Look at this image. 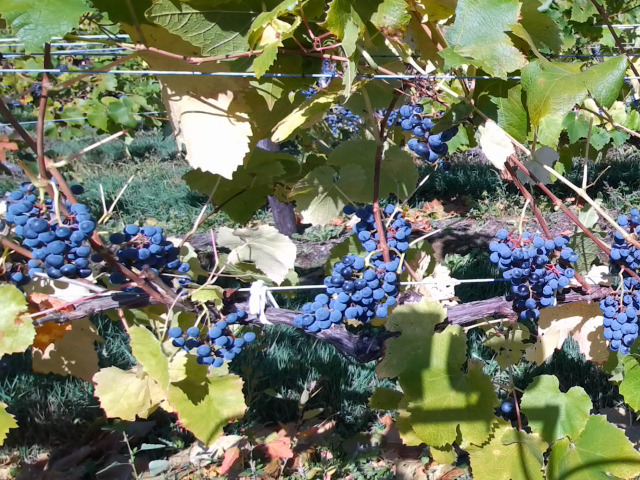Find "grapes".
<instances>
[{
    "label": "grapes",
    "instance_id": "grapes-2",
    "mask_svg": "<svg viewBox=\"0 0 640 480\" xmlns=\"http://www.w3.org/2000/svg\"><path fill=\"white\" fill-rule=\"evenodd\" d=\"M34 185L30 182L20 183V191H11L10 202L6 203L5 220L7 223H16L15 233L24 238L25 245L32 249L28 260V275L45 273L52 279H69L88 277L91 267L88 258L91 253L89 246H81V241L96 228V222L92 219L90 207L86 204H72L68 199L65 205L71 214L76 217L72 227L59 226V221L54 220L50 225L47 219L36 216L40 213L39 207H34L37 196L32 192Z\"/></svg>",
    "mask_w": 640,
    "mask_h": 480
},
{
    "label": "grapes",
    "instance_id": "grapes-6",
    "mask_svg": "<svg viewBox=\"0 0 640 480\" xmlns=\"http://www.w3.org/2000/svg\"><path fill=\"white\" fill-rule=\"evenodd\" d=\"M142 233L148 238V244L142 249L126 247L117 251V257L121 263L128 268L142 269L146 264L155 274H158L162 267L174 269L179 273L177 283L181 287H187L192 282V277L185 272L191 269L189 262H180L177 259L179 249L174 247L171 240H165L163 228L161 226L144 225Z\"/></svg>",
    "mask_w": 640,
    "mask_h": 480
},
{
    "label": "grapes",
    "instance_id": "grapes-5",
    "mask_svg": "<svg viewBox=\"0 0 640 480\" xmlns=\"http://www.w3.org/2000/svg\"><path fill=\"white\" fill-rule=\"evenodd\" d=\"M245 316L244 310H237L235 313H230L225 317V321H218L215 323V327L207 332V338L213 340L215 345H220L221 349H217L216 353L219 355L214 358L211 355L212 347L208 344L201 345V342L197 337L200 334L198 327H190L186 330L188 337H193L189 341L182 335V329L180 327H171L167 330V335L173 337V346L181 347L186 351L196 349V354L199 357L196 359V363L199 365H212L214 368H221L224 365V358L227 361H232L242 351V345L251 343L256 339L254 332H247L242 335L241 338H234L232 335L224 333V329L228 327V323H235L238 319H242Z\"/></svg>",
    "mask_w": 640,
    "mask_h": 480
},
{
    "label": "grapes",
    "instance_id": "grapes-10",
    "mask_svg": "<svg viewBox=\"0 0 640 480\" xmlns=\"http://www.w3.org/2000/svg\"><path fill=\"white\" fill-rule=\"evenodd\" d=\"M391 226L398 227V231L395 233V238L387 240V244L398 251H407L410 235L412 234V225L407 222L406 218H402L401 213H397L391 221Z\"/></svg>",
    "mask_w": 640,
    "mask_h": 480
},
{
    "label": "grapes",
    "instance_id": "grapes-11",
    "mask_svg": "<svg viewBox=\"0 0 640 480\" xmlns=\"http://www.w3.org/2000/svg\"><path fill=\"white\" fill-rule=\"evenodd\" d=\"M617 223L619 225L635 224V232L640 234V215L637 207H632L629 211V215L622 214L617 217Z\"/></svg>",
    "mask_w": 640,
    "mask_h": 480
},
{
    "label": "grapes",
    "instance_id": "grapes-3",
    "mask_svg": "<svg viewBox=\"0 0 640 480\" xmlns=\"http://www.w3.org/2000/svg\"><path fill=\"white\" fill-rule=\"evenodd\" d=\"M523 239L530 240L532 247H515L513 243H501L500 241H492L488 244L489 261L491 264H497L502 271L504 281H509L511 285V293L517 295L516 306L519 309L526 308L520 312L521 320H528L540 317V311L536 307L537 301L534 298H528L526 301L523 297L529 294V289L523 279L528 280L531 291L540 294V304L544 307L554 305L553 291L557 288L566 287L569 279L575 276V269L561 267L560 263H556V270H549L545 265L550 261L551 251L556 248L563 249L559 253V259L563 262L575 264L579 261V254L573 248L568 246L570 237L563 235L555 237L553 240L544 239L539 235H531L529 232L522 233Z\"/></svg>",
    "mask_w": 640,
    "mask_h": 480
},
{
    "label": "grapes",
    "instance_id": "grapes-7",
    "mask_svg": "<svg viewBox=\"0 0 640 480\" xmlns=\"http://www.w3.org/2000/svg\"><path fill=\"white\" fill-rule=\"evenodd\" d=\"M424 111L422 104H404L399 109L401 118L398 123L401 124L403 131H411L415 137L410 138L406 142L409 150L414 151L417 156L425 155L428 162H436L439 154L443 155L448 152L447 142L454 139L458 134V128L452 127L450 131L439 132L438 135H430L427 138L429 145L418 143L417 137H425L430 128L434 126L432 117H420Z\"/></svg>",
    "mask_w": 640,
    "mask_h": 480
},
{
    "label": "grapes",
    "instance_id": "grapes-8",
    "mask_svg": "<svg viewBox=\"0 0 640 480\" xmlns=\"http://www.w3.org/2000/svg\"><path fill=\"white\" fill-rule=\"evenodd\" d=\"M343 213L345 215H356L357 218H361L358 223L352 226V233L358 234L357 238L361 242V246L366 251H373L376 249V242L379 241L378 232H375L372 235L371 232L367 230L368 223L371 224L373 229H377L376 220L374 218L373 206L366 205L364 209H356L352 205H345L343 207Z\"/></svg>",
    "mask_w": 640,
    "mask_h": 480
},
{
    "label": "grapes",
    "instance_id": "grapes-9",
    "mask_svg": "<svg viewBox=\"0 0 640 480\" xmlns=\"http://www.w3.org/2000/svg\"><path fill=\"white\" fill-rule=\"evenodd\" d=\"M614 235L615 236L613 237V241L615 244L610 246V259L612 261H619L623 256L630 268H638V261L640 260V249L634 246L631 242H628V240L616 230L614 231Z\"/></svg>",
    "mask_w": 640,
    "mask_h": 480
},
{
    "label": "grapes",
    "instance_id": "grapes-1",
    "mask_svg": "<svg viewBox=\"0 0 640 480\" xmlns=\"http://www.w3.org/2000/svg\"><path fill=\"white\" fill-rule=\"evenodd\" d=\"M389 261L377 253L370 263L378 269L366 268V260L357 254L344 255L333 264L332 276L323 278L326 294H316L314 302L301 306L302 316L295 315L296 326L305 327L309 334L327 330L344 317L358 319L368 324L374 316L385 319L388 307L397 303L399 288L395 284L400 256L389 250ZM354 269L362 272V278L352 280Z\"/></svg>",
    "mask_w": 640,
    "mask_h": 480
},
{
    "label": "grapes",
    "instance_id": "grapes-4",
    "mask_svg": "<svg viewBox=\"0 0 640 480\" xmlns=\"http://www.w3.org/2000/svg\"><path fill=\"white\" fill-rule=\"evenodd\" d=\"M624 307L619 313V302L613 295H608L598 302L603 310V337L611 339L610 350L619 351L622 355L630 353V346L638 337L640 312V283L633 277H626L623 292Z\"/></svg>",
    "mask_w": 640,
    "mask_h": 480
}]
</instances>
